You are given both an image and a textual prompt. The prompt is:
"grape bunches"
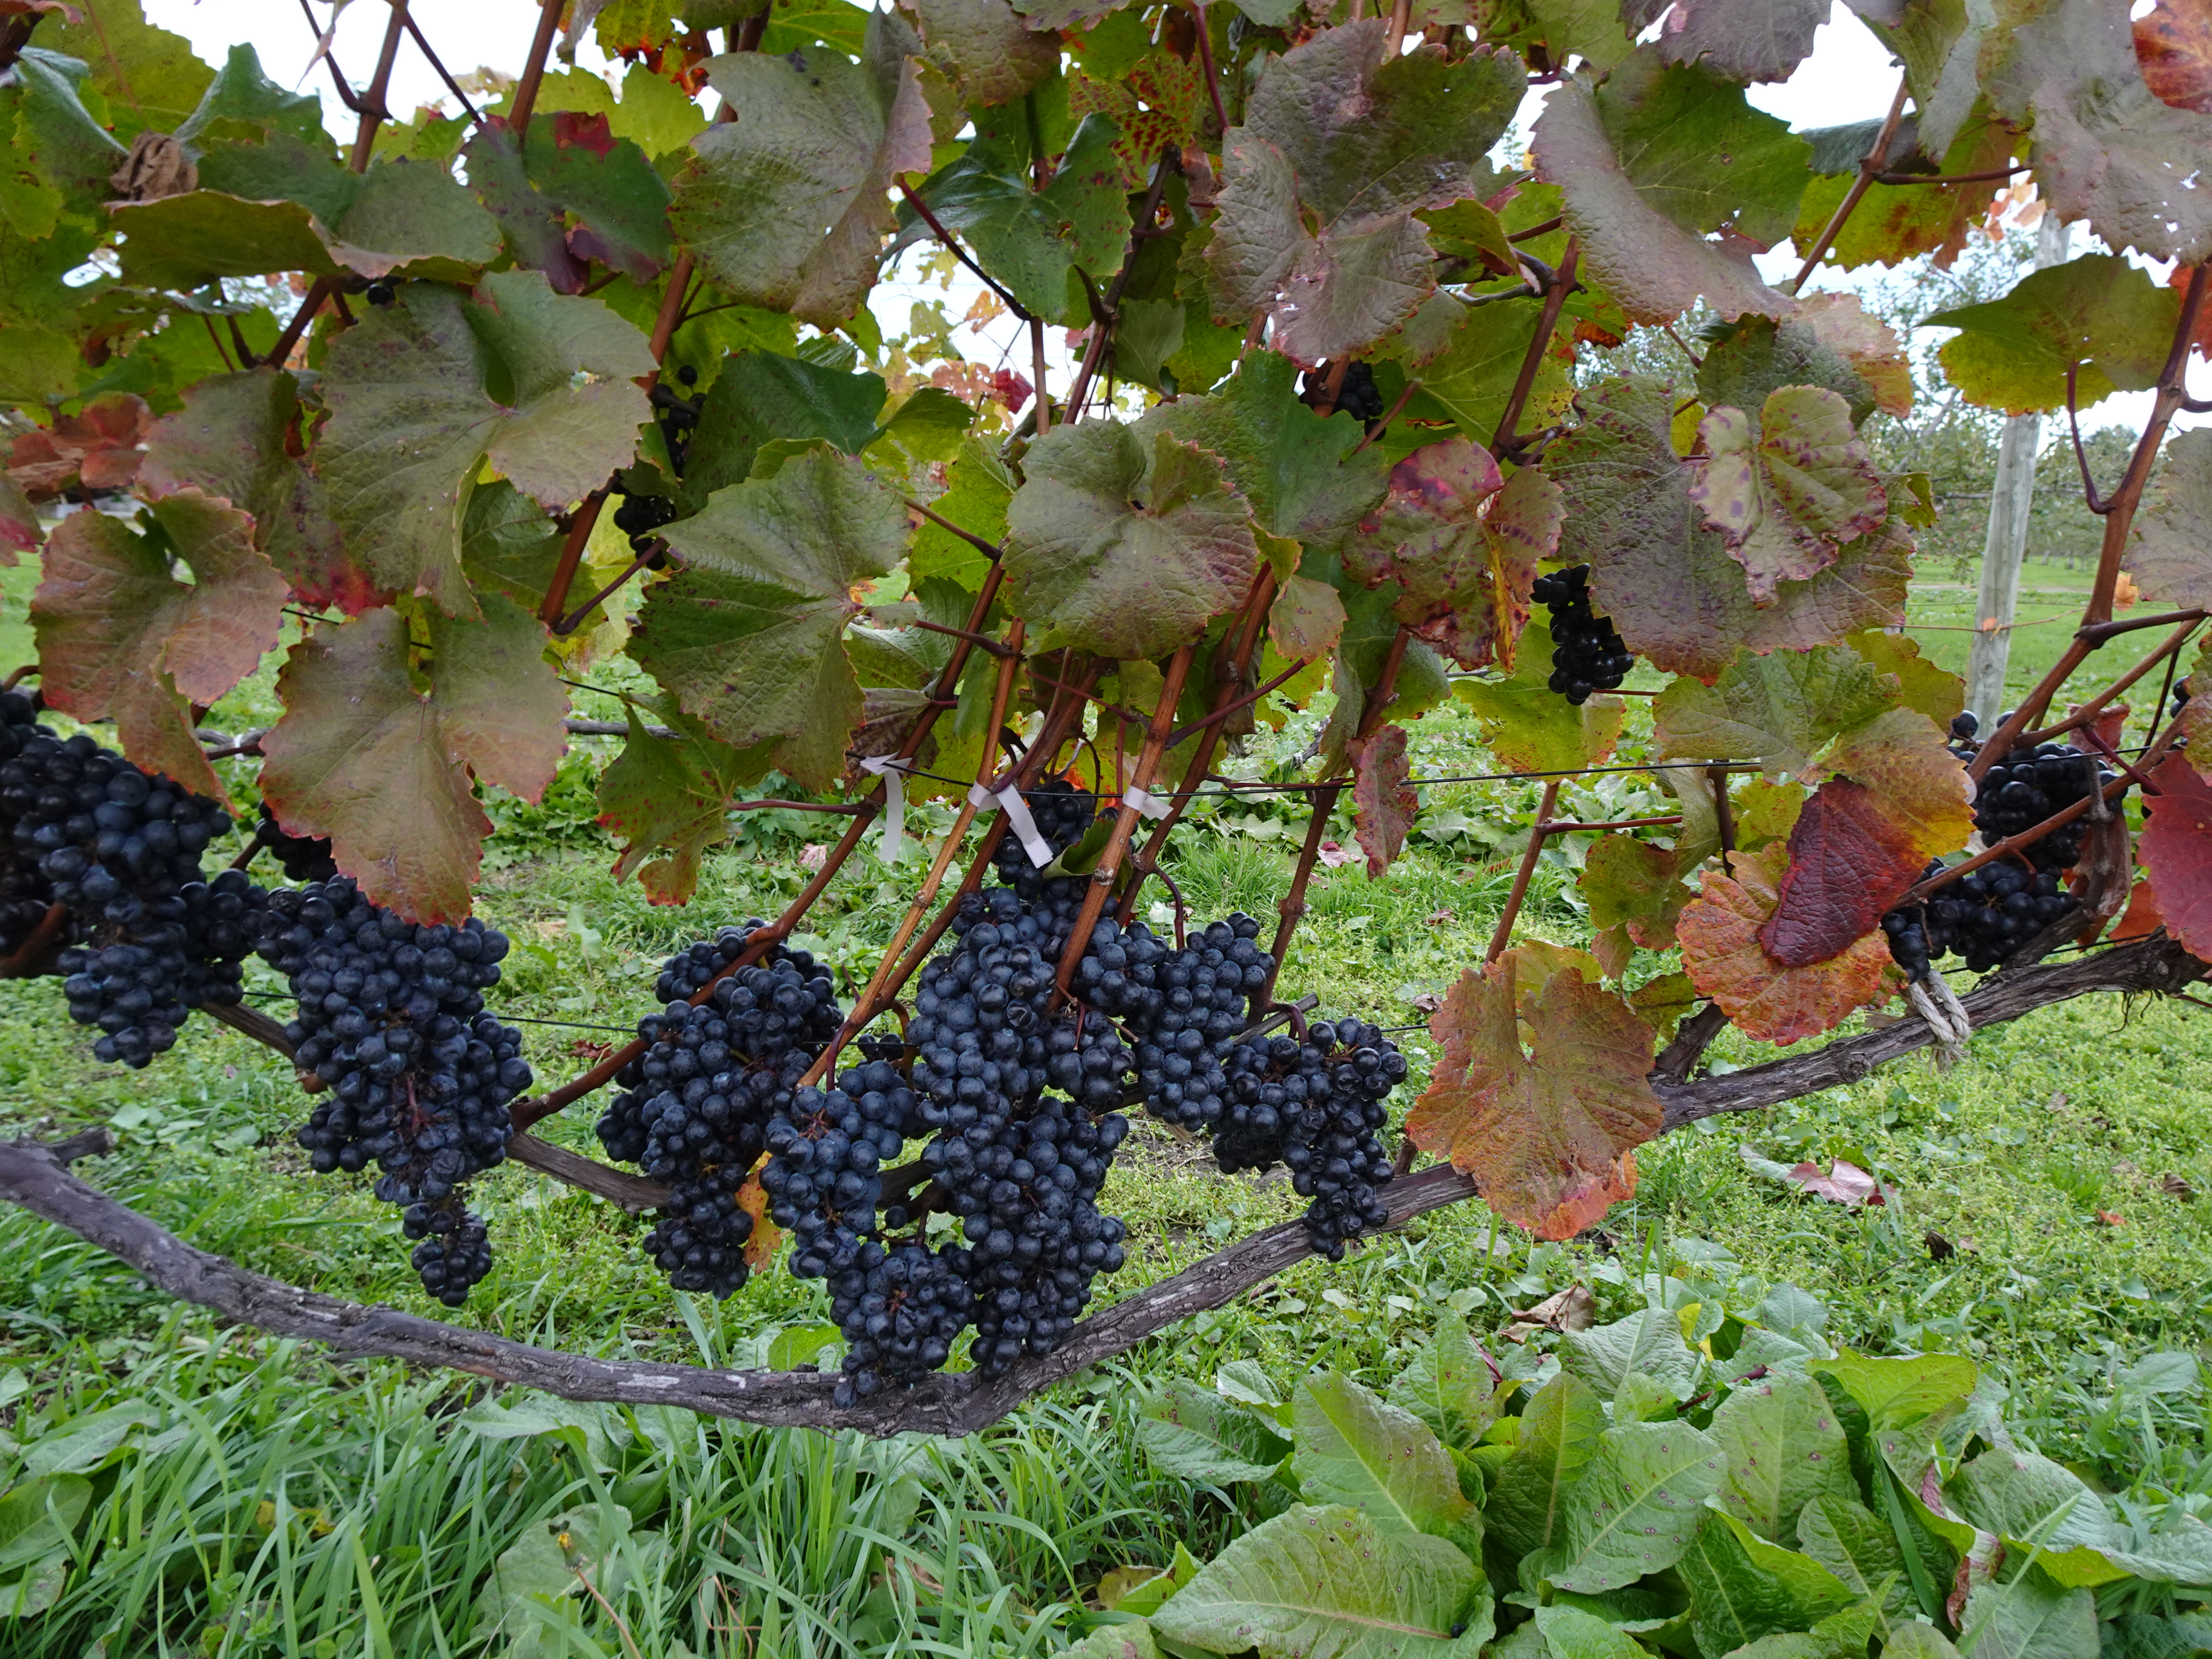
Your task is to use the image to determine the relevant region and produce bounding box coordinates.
[180,868,271,1008]
[454,1012,532,1174]
[402,1196,493,1306]
[1209,1033,1309,1173]
[758,1063,917,1278]
[1299,359,1387,442]
[1880,856,1965,983]
[2140,679,2191,817]
[828,1242,977,1398]
[1033,900,1167,1018]
[1947,709,2128,881]
[595,919,834,1162]
[905,886,1055,1134]
[1529,564,1635,706]
[255,874,508,1205]
[1120,913,1274,1131]
[638,959,843,1300]
[920,1097,1128,1381]
[0,735,233,1069]
[1044,1008,1139,1113]
[1286,1020,1405,1261]
[990,777,1135,905]
[608,366,708,570]
[302,1098,369,1172]
[1947,860,2078,972]
[0,693,57,980]
[255,798,338,884]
